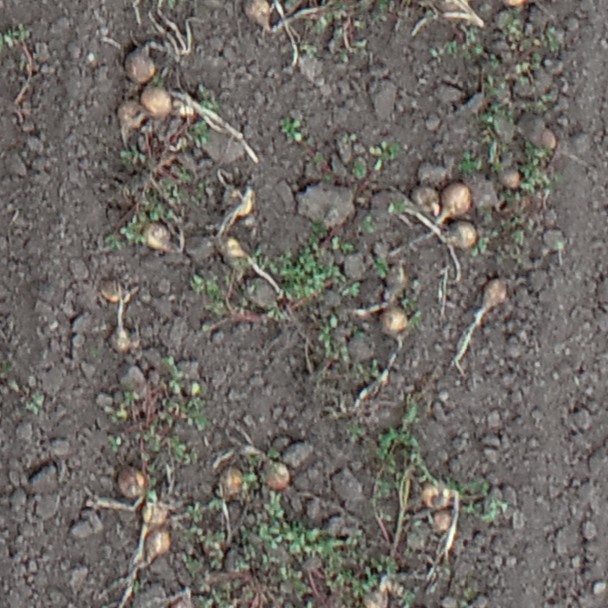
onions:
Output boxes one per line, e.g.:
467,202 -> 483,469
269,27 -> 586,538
100,282 -> 123,303
222,182 -> 250,211
241,0 -> 272,24
123,49 -> 158,82
481,277 -> 509,305
216,468 -> 246,498
420,162 -> 447,188
437,181 -> 470,217
426,484 -> 450,510
260,461 -> 290,491
412,185 -> 438,214
384,264 -> 407,292
144,532 -> 170,561
119,102 -> 147,127
142,501 -> 169,526
109,328 -> 133,356
141,84 -> 172,116
502,0 -> 532,8
527,126 -> 557,155
142,222 -> 172,252
116,468 -> 145,498
498,167 -> 522,187
381,304 -> 410,334
442,219 -> 476,249
437,0 -> 468,13
430,509 -> 452,530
